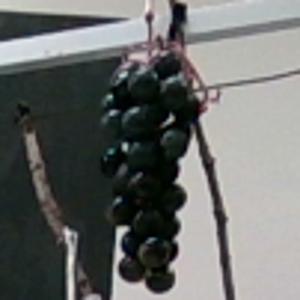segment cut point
Here are the masks:
<instances>
[{"label": "cut point", "instance_id": "1", "mask_svg": "<svg viewBox=\"0 0 300 300\" xmlns=\"http://www.w3.org/2000/svg\"><path fill=\"white\" fill-rule=\"evenodd\" d=\"M142 20L147 27V63L152 60V34L154 30L155 20V0H144V11L142 12Z\"/></svg>", "mask_w": 300, "mask_h": 300}]
</instances>
